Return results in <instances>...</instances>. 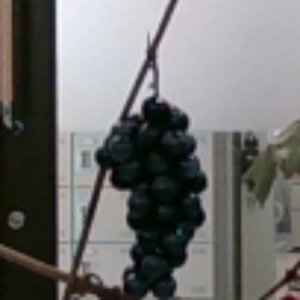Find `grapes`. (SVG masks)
Masks as SVG:
<instances>
[{"label":"grapes","mask_w":300,"mask_h":300,"mask_svg":"<svg viewBox=\"0 0 300 300\" xmlns=\"http://www.w3.org/2000/svg\"><path fill=\"white\" fill-rule=\"evenodd\" d=\"M190 119L180 106L153 95L135 113L116 123L95 161L112 169L109 182L118 192L130 191L126 222L137 233L129 249L135 262L121 275L123 290L134 299L153 291L173 296V268L186 261L185 248L206 220L200 194L208 179L192 155L196 137L187 132Z\"/></svg>","instance_id":"obj_1"}]
</instances>
